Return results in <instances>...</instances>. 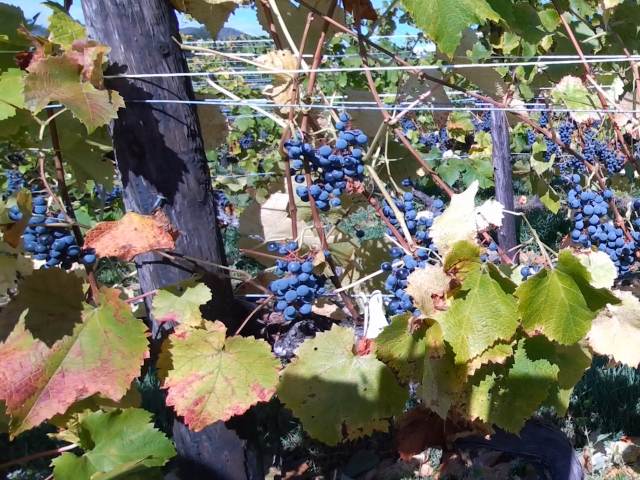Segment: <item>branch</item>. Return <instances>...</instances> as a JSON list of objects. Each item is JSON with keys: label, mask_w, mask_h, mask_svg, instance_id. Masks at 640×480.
Wrapping results in <instances>:
<instances>
[{"label": "branch", "mask_w": 640, "mask_h": 480, "mask_svg": "<svg viewBox=\"0 0 640 480\" xmlns=\"http://www.w3.org/2000/svg\"><path fill=\"white\" fill-rule=\"evenodd\" d=\"M337 0H331L328 11H327V15H325L322 11H320L317 7L313 6L312 4L301 0L300 4L304 7H306L307 9H309L306 20H305V24H304V28H303V32H302V37H301V43H300V47H299V52H298V58L295 64V68L299 69L301 67V63L303 60V54H304V49L306 46V39H307V34H308V30L310 28V22L311 19L313 17V13H315L316 15L320 16L323 20H325L324 22V27L322 29V32L320 33L319 36V40H318V45H317V51L314 55L313 61H312V68H317V63L319 60V57L321 56L322 53V47H323V42L325 39V36L327 35L328 29H329V25L330 23L332 25H335L339 28H341L342 30H345L346 32H349L350 34L356 36L359 39V48L361 50L362 53V65L364 67L368 66V57L366 54V46L365 43L370 44L374 49H376L378 52L383 53L385 56H387L389 59L393 60V61H397L401 66H409L408 63H406L405 61H403V59L399 56H395L393 54H391L387 49L382 48L380 45H378L376 42H374L372 39H370L369 37H366L364 35H362V31H361V27H360V18H359V12L358 11H354L353 15H354V21H355V30L352 29L351 27H348L347 25H345L344 23H341L337 20H335L334 18H332V14H333V10L335 7Z\"/></svg>", "instance_id": "30e6481e"}, {"label": "branch", "mask_w": 640, "mask_h": 480, "mask_svg": "<svg viewBox=\"0 0 640 480\" xmlns=\"http://www.w3.org/2000/svg\"><path fill=\"white\" fill-rule=\"evenodd\" d=\"M55 124H56V121L54 119H50L48 121L49 136H50V141L52 146V154H53L54 161L56 163V168H57V187H58V192L63 202V208L66 214L70 219H74L76 217V214L73 212L70 206V200L65 190L64 166H63V161L61 159V154L59 152V144H58Z\"/></svg>", "instance_id": "325d2c04"}, {"label": "branch", "mask_w": 640, "mask_h": 480, "mask_svg": "<svg viewBox=\"0 0 640 480\" xmlns=\"http://www.w3.org/2000/svg\"><path fill=\"white\" fill-rule=\"evenodd\" d=\"M511 115L514 116L515 118L519 119V120H522L523 122H527L530 125H532L534 128H536L537 130L542 132L544 135H546L559 149H561L563 152L571 155L572 158L574 160H576L577 162H579V163L583 164L584 166H586V168L589 169L590 171H592L593 174L595 175V177L597 179V182H598L599 188L601 190L605 189V185L603 184V179H602L598 169L595 168L593 165H591L582 156H580L578 152L574 151L571 147H567L566 145L562 144L553 134H551L550 131L545 129L542 125H539L538 123H536L533 119H531L529 117H526L524 115H521L519 113H511Z\"/></svg>", "instance_id": "170604dd"}, {"label": "branch", "mask_w": 640, "mask_h": 480, "mask_svg": "<svg viewBox=\"0 0 640 480\" xmlns=\"http://www.w3.org/2000/svg\"><path fill=\"white\" fill-rule=\"evenodd\" d=\"M382 115L383 117L387 120V122L390 124V126L393 128V130L395 131V133L398 135V137L401 139L402 143L405 145L406 149L413 155V157L419 161V164L421 166V168L426 171L428 174H430L435 180L436 182L440 185V187L442 188V190L447 193L449 196H453L454 192L452 190H450L446 184L443 182V180L440 178V176L431 168H429L425 162H424V158L422 156H420L416 150H414V148L410 145V142L406 139V137L403 135V133L401 132L400 128L398 127V125L393 121V119L390 117V115L388 114V112L386 111H382Z\"/></svg>", "instance_id": "45aa463d"}, {"label": "branch", "mask_w": 640, "mask_h": 480, "mask_svg": "<svg viewBox=\"0 0 640 480\" xmlns=\"http://www.w3.org/2000/svg\"><path fill=\"white\" fill-rule=\"evenodd\" d=\"M415 74L419 77H424L427 80L431 81L432 83H436V84H440L446 88H451V89H455L457 91L463 92L471 97H474L476 99H481L483 101H486L488 103H491L495 106L498 107H509L506 103L495 100L493 98H490L488 96H485L484 94H478L476 92H473L465 87L459 86L458 84H453V83H448L447 81H444L443 79H438V78H434L433 76H431L430 74L426 73V72H422L420 70L415 71Z\"/></svg>", "instance_id": "982ccf7c"}, {"label": "branch", "mask_w": 640, "mask_h": 480, "mask_svg": "<svg viewBox=\"0 0 640 480\" xmlns=\"http://www.w3.org/2000/svg\"><path fill=\"white\" fill-rule=\"evenodd\" d=\"M290 170V159L286 158L285 159V179H286V183L288 186V210H289V216L292 217V232H291V238L293 242L297 241V237H298V233H297V206H296V202L294 201V196H293V183L291 181V176L288 174V171Z\"/></svg>", "instance_id": "1ff4a987"}, {"label": "branch", "mask_w": 640, "mask_h": 480, "mask_svg": "<svg viewBox=\"0 0 640 480\" xmlns=\"http://www.w3.org/2000/svg\"><path fill=\"white\" fill-rule=\"evenodd\" d=\"M362 193L365 195L366 199L371 203V205L374 207V209L378 212L382 222L391 230V232L394 234V237L403 245V247L406 250V252L408 254H410V255H413L414 251L410 248L408 242L402 236H400V234L397 231L396 227L387 219V217L385 216L383 210L377 204V202L374 200V198L371 196L369 191L367 189H363Z\"/></svg>", "instance_id": "ea751061"}, {"label": "branch", "mask_w": 640, "mask_h": 480, "mask_svg": "<svg viewBox=\"0 0 640 480\" xmlns=\"http://www.w3.org/2000/svg\"><path fill=\"white\" fill-rule=\"evenodd\" d=\"M307 202H308L310 215L314 222L315 229L319 238L320 246L323 250H327L329 248V245L327 244V239L324 233V229L316 209L314 197L312 195H309L307 197Z\"/></svg>", "instance_id": "ca6c30ca"}, {"label": "branch", "mask_w": 640, "mask_h": 480, "mask_svg": "<svg viewBox=\"0 0 640 480\" xmlns=\"http://www.w3.org/2000/svg\"><path fill=\"white\" fill-rule=\"evenodd\" d=\"M551 4L554 6L555 12L558 15L559 19L561 20L564 29L567 32V35L572 43V45L576 48V51L578 52V54L580 55L581 59H586L585 53L584 51L581 49V46L579 45V43L576 41L573 32L571 30V28L568 25L567 19L565 18V16L563 15V13L560 10L559 4L556 0H552Z\"/></svg>", "instance_id": "1d269e1b"}, {"label": "branch", "mask_w": 640, "mask_h": 480, "mask_svg": "<svg viewBox=\"0 0 640 480\" xmlns=\"http://www.w3.org/2000/svg\"><path fill=\"white\" fill-rule=\"evenodd\" d=\"M608 118L610 120V123L614 126V128L617 131L618 137L620 139L621 145L623 150L625 151L629 161L632 163V165L636 168V170L638 172H640V165L638 164V162L636 161V159L633 157L629 147L627 146V142L625 140V136L623 134V131L620 127V125L618 124V122L615 120L614 116L612 114L608 115Z\"/></svg>", "instance_id": "1af6ec82"}, {"label": "branch", "mask_w": 640, "mask_h": 480, "mask_svg": "<svg viewBox=\"0 0 640 480\" xmlns=\"http://www.w3.org/2000/svg\"><path fill=\"white\" fill-rule=\"evenodd\" d=\"M261 2L263 4V6H264V10H265V13H266L267 18H268V24L270 26V30L272 31L273 37L275 39L277 49L281 50L282 49V43H281V40H280V36L278 35V31H277V29L275 27V23L273 21V15L271 13L268 1L267 0H261Z\"/></svg>", "instance_id": "2b1400db"}, {"label": "branch", "mask_w": 640, "mask_h": 480, "mask_svg": "<svg viewBox=\"0 0 640 480\" xmlns=\"http://www.w3.org/2000/svg\"><path fill=\"white\" fill-rule=\"evenodd\" d=\"M340 297L342 298L343 303L345 304V306L348 308V310L353 314L356 322L359 325H363L365 323V320L363 319L361 313L358 311V309L354 306V304L351 302L349 295L344 291L341 290L339 292Z\"/></svg>", "instance_id": "8bde2521"}, {"label": "branch", "mask_w": 640, "mask_h": 480, "mask_svg": "<svg viewBox=\"0 0 640 480\" xmlns=\"http://www.w3.org/2000/svg\"><path fill=\"white\" fill-rule=\"evenodd\" d=\"M584 68L587 69L590 77L592 78V81L594 82L595 90H596V92L598 94V97L600 99L601 105L603 106V108L605 110H608L609 109V105L607 104V102L605 100V97H604L603 92H602V90L600 88L599 80H598L596 74L594 73L592 67L589 64H585Z\"/></svg>", "instance_id": "a944a4c4"}, {"label": "branch", "mask_w": 640, "mask_h": 480, "mask_svg": "<svg viewBox=\"0 0 640 480\" xmlns=\"http://www.w3.org/2000/svg\"><path fill=\"white\" fill-rule=\"evenodd\" d=\"M609 203H610V208H611L613 214L616 216L615 220L618 223V227L622 228V230L624 231L623 235L626 237V239L628 241H631L632 240V236L630 235V233L628 231H626L627 230V225H626L621 213L617 210V208L615 206V201L613 199H610Z\"/></svg>", "instance_id": "afce2bb1"}, {"label": "branch", "mask_w": 640, "mask_h": 480, "mask_svg": "<svg viewBox=\"0 0 640 480\" xmlns=\"http://www.w3.org/2000/svg\"><path fill=\"white\" fill-rule=\"evenodd\" d=\"M301 123H302L303 141L304 142H308L309 141V138H308L309 124L312 127V130L314 132L318 131V126L316 125V123L314 122L313 117L310 114L303 115L301 117Z\"/></svg>", "instance_id": "7c5c6f52"}, {"label": "branch", "mask_w": 640, "mask_h": 480, "mask_svg": "<svg viewBox=\"0 0 640 480\" xmlns=\"http://www.w3.org/2000/svg\"><path fill=\"white\" fill-rule=\"evenodd\" d=\"M89 282L91 284V290H92V295L94 297H97L99 295V288H98V282L96 279V276L94 274V270L90 265H87L85 267Z\"/></svg>", "instance_id": "46de074c"}, {"label": "branch", "mask_w": 640, "mask_h": 480, "mask_svg": "<svg viewBox=\"0 0 640 480\" xmlns=\"http://www.w3.org/2000/svg\"><path fill=\"white\" fill-rule=\"evenodd\" d=\"M366 78H367V82L369 84V88L370 91L372 93L373 99L376 101L378 106H383V102L380 99V97L378 96V93L376 91L372 76H371V72H365Z\"/></svg>", "instance_id": "725ea6d5"}, {"label": "branch", "mask_w": 640, "mask_h": 480, "mask_svg": "<svg viewBox=\"0 0 640 480\" xmlns=\"http://www.w3.org/2000/svg\"><path fill=\"white\" fill-rule=\"evenodd\" d=\"M327 262L334 275V276H329L328 281H331L337 289H340L342 287V283L338 280V275L333 264V257H330L329 259H327Z\"/></svg>", "instance_id": "419ea82b"}, {"label": "branch", "mask_w": 640, "mask_h": 480, "mask_svg": "<svg viewBox=\"0 0 640 480\" xmlns=\"http://www.w3.org/2000/svg\"><path fill=\"white\" fill-rule=\"evenodd\" d=\"M315 80H316V75L315 73H310V78H309V84H308V88H307V92L305 95V104H311V94L313 91V86L315 84Z\"/></svg>", "instance_id": "f94cb5ad"}, {"label": "branch", "mask_w": 640, "mask_h": 480, "mask_svg": "<svg viewBox=\"0 0 640 480\" xmlns=\"http://www.w3.org/2000/svg\"><path fill=\"white\" fill-rule=\"evenodd\" d=\"M298 80H299V74H294V78H293V82H292L291 95H290V103L291 104L295 103Z\"/></svg>", "instance_id": "b461a5f5"}, {"label": "branch", "mask_w": 640, "mask_h": 480, "mask_svg": "<svg viewBox=\"0 0 640 480\" xmlns=\"http://www.w3.org/2000/svg\"><path fill=\"white\" fill-rule=\"evenodd\" d=\"M72 233H73V235H74V238L76 239V241H77L80 245H83V244L85 243V240L83 239V237H82V235H81V233H80V231H79V228H78L77 226H74V227L72 228Z\"/></svg>", "instance_id": "0754386c"}]
</instances>
